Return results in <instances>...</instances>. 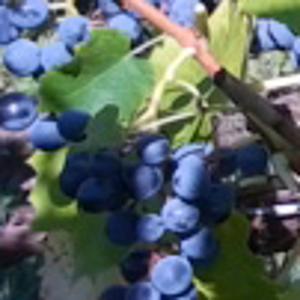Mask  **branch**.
<instances>
[{"label": "branch", "mask_w": 300, "mask_h": 300, "mask_svg": "<svg viewBox=\"0 0 300 300\" xmlns=\"http://www.w3.org/2000/svg\"><path fill=\"white\" fill-rule=\"evenodd\" d=\"M127 5L157 27L170 33L171 37L185 50L197 53L202 66L226 98L250 113L284 143L300 150V127L287 118L276 105L264 98L256 87L222 68L206 42L144 0H127Z\"/></svg>", "instance_id": "branch-1"}]
</instances>
